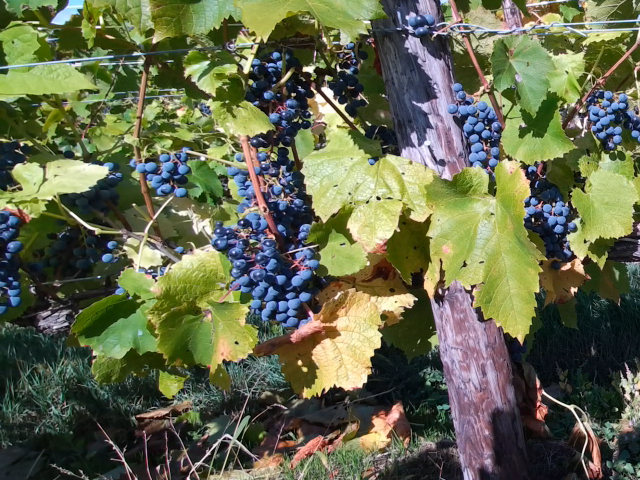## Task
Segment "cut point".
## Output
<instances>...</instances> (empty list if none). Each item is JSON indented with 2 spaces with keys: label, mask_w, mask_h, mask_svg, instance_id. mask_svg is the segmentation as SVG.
<instances>
[{
  "label": "cut point",
  "mask_w": 640,
  "mask_h": 480,
  "mask_svg": "<svg viewBox=\"0 0 640 480\" xmlns=\"http://www.w3.org/2000/svg\"><path fill=\"white\" fill-rule=\"evenodd\" d=\"M138 139L142 140V141H144V142H146V143H148L150 145H152L153 147L156 148L157 151H161L162 150V147L159 145L158 142H156L155 140H153V139H151L149 137H146L145 135H140L138 137Z\"/></svg>",
  "instance_id": "cut-point-1"
},
{
  "label": "cut point",
  "mask_w": 640,
  "mask_h": 480,
  "mask_svg": "<svg viewBox=\"0 0 640 480\" xmlns=\"http://www.w3.org/2000/svg\"><path fill=\"white\" fill-rule=\"evenodd\" d=\"M255 211H260V208L258 206H251L249 210L241 214V217L245 218L247 215L254 213Z\"/></svg>",
  "instance_id": "cut-point-2"
}]
</instances>
